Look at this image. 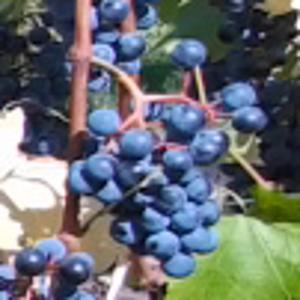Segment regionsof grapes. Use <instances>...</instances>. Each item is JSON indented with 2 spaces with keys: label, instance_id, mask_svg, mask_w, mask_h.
Instances as JSON below:
<instances>
[{
  "label": "grapes",
  "instance_id": "grapes-4",
  "mask_svg": "<svg viewBox=\"0 0 300 300\" xmlns=\"http://www.w3.org/2000/svg\"><path fill=\"white\" fill-rule=\"evenodd\" d=\"M210 61L209 44L201 37L180 39L171 49V62L180 71H204Z\"/></svg>",
  "mask_w": 300,
  "mask_h": 300
},
{
  "label": "grapes",
  "instance_id": "grapes-1",
  "mask_svg": "<svg viewBox=\"0 0 300 300\" xmlns=\"http://www.w3.org/2000/svg\"><path fill=\"white\" fill-rule=\"evenodd\" d=\"M249 79H228L208 95V107L173 98L150 99L124 123L97 107L84 118L83 159L72 161V189L111 207L108 235L174 278L195 271V255L213 253L223 206L213 199L211 172L231 150L227 118L237 132L263 135L272 116Z\"/></svg>",
  "mask_w": 300,
  "mask_h": 300
},
{
  "label": "grapes",
  "instance_id": "grapes-5",
  "mask_svg": "<svg viewBox=\"0 0 300 300\" xmlns=\"http://www.w3.org/2000/svg\"><path fill=\"white\" fill-rule=\"evenodd\" d=\"M86 90L90 93L108 91L113 86V77L98 65H90L87 69Z\"/></svg>",
  "mask_w": 300,
  "mask_h": 300
},
{
  "label": "grapes",
  "instance_id": "grapes-2",
  "mask_svg": "<svg viewBox=\"0 0 300 300\" xmlns=\"http://www.w3.org/2000/svg\"><path fill=\"white\" fill-rule=\"evenodd\" d=\"M94 269L86 253H70L61 239L34 242L0 265V300H93L78 290Z\"/></svg>",
  "mask_w": 300,
  "mask_h": 300
},
{
  "label": "grapes",
  "instance_id": "grapes-3",
  "mask_svg": "<svg viewBox=\"0 0 300 300\" xmlns=\"http://www.w3.org/2000/svg\"><path fill=\"white\" fill-rule=\"evenodd\" d=\"M159 0H94L90 12L91 47L95 55L139 75L145 68L142 31L158 21Z\"/></svg>",
  "mask_w": 300,
  "mask_h": 300
}]
</instances>
